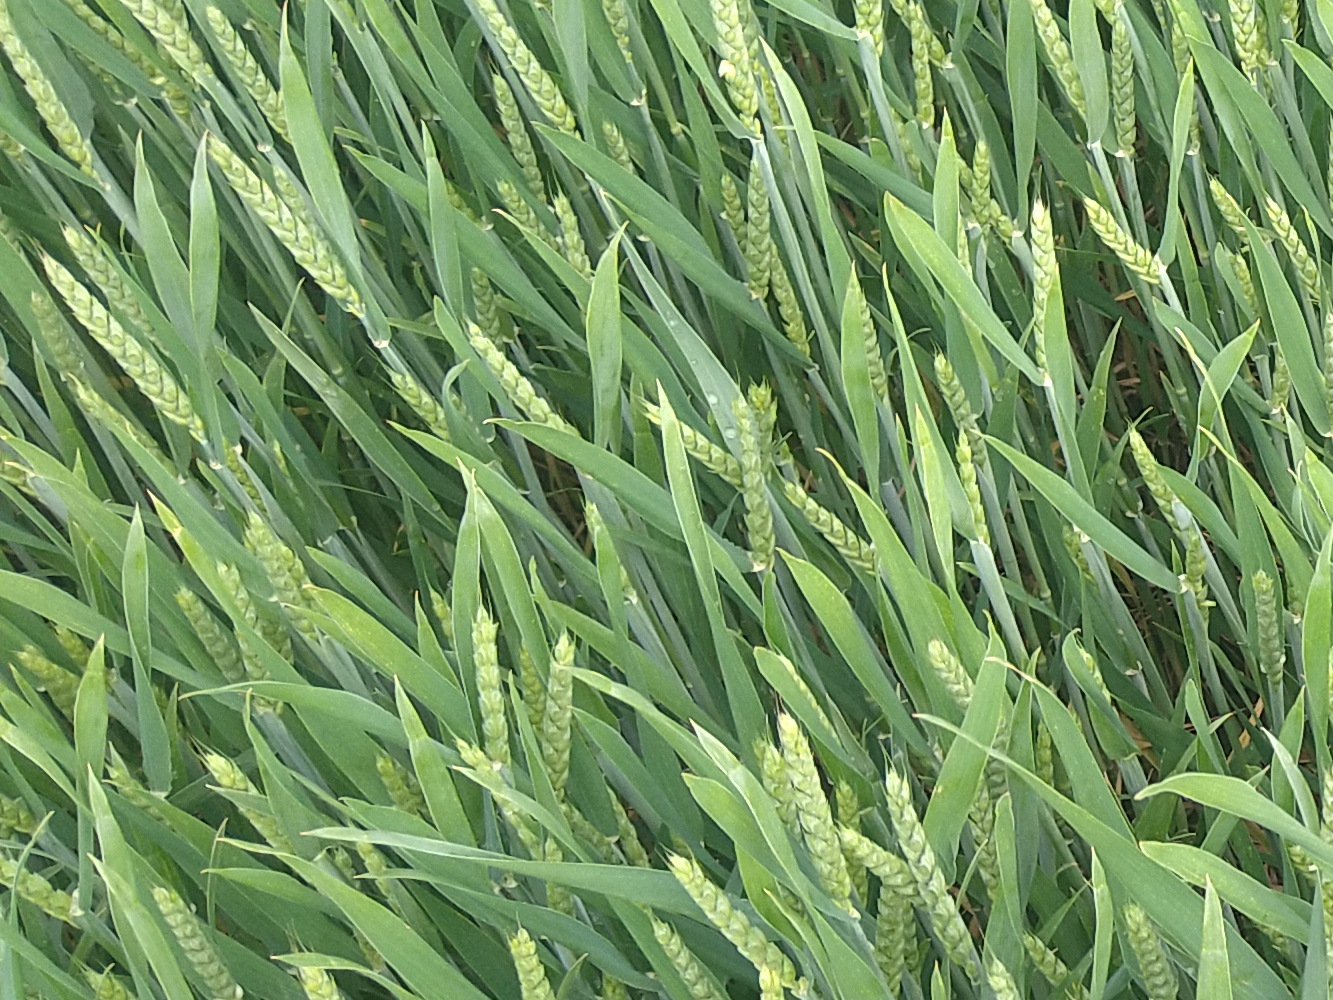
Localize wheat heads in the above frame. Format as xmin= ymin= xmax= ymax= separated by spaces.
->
xmin=1035 ymin=199 xmax=1050 ymax=363
xmin=1024 ymin=932 xmax=1100 ymax=1000
xmin=841 ymin=0 xmax=948 ymax=64
xmin=247 ymin=512 xmax=318 ymax=604
xmin=243 ymin=530 xmax=314 ymax=658
xmin=923 ymin=638 xmax=973 ymax=708
xmin=952 ymin=208 xmax=984 ymax=242
xmin=572 ymin=0 xmax=632 ymax=52
xmin=1062 ymin=529 xmax=1083 ymax=566
xmin=760 ymin=743 xmax=813 ymax=869
xmin=1321 ymin=310 xmax=1333 ymax=441
xmin=42 ymin=256 xmax=199 ymax=438
xmin=15 ymin=652 xmax=82 ymax=724
xmin=721 ymin=177 xmax=749 ymax=253
xmin=1266 ymin=195 xmax=1327 ymax=305
xmin=273 ymin=162 xmax=326 ymax=235
xmin=1073 ymin=638 xmax=1110 ymax=704
xmin=61 ymin=0 xmax=207 ymax=63
xmin=63 ymin=632 xmax=116 ymax=693
xmin=115 ymin=775 xmax=176 ymax=837
xmin=1175 ymin=15 xmax=1203 ymax=151
xmin=1021 ymin=0 xmax=1089 ymax=109
xmin=735 ymin=0 xmax=791 ymax=139
xmin=373 ymin=752 xmax=413 ymax=815
xmin=1254 ymin=569 xmax=1286 ymax=691
xmin=77 ymin=52 xmax=126 ymax=101
xmin=835 ymin=776 xmax=866 ymax=908
xmin=738 ymin=404 xmax=780 ymax=569
xmin=49 ymin=0 xmax=163 ymax=74
xmin=755 ymin=394 xmax=775 ymax=464
xmin=0 ymin=862 xmax=81 ymax=927
xmin=833 ymin=830 xmax=927 ymax=912
xmin=667 ymin=852 xmax=800 ymax=987
xmin=890 ymin=111 xmax=924 ymax=178
xmin=208 ymin=139 xmax=359 ymax=312
xmin=698 ymin=0 xmax=762 ymax=119
xmin=602 ymin=122 xmax=638 ymax=176
xmin=447 ymin=182 xmax=475 ymax=225
xmin=1187 ymin=537 xmax=1194 ymax=590
xmin=1313 ymin=881 xmax=1333 ymax=945
xmin=970 ymin=140 xmax=994 ymax=209
xmin=746 ymin=149 xmax=769 ymax=298
xmin=426 ymin=587 xmax=451 ymax=654
xmin=773 ymin=713 xmax=849 ymax=901
xmin=0 ymin=217 xmax=24 ymax=255
xmin=1209 ymin=182 xmax=1250 ymax=247
xmin=474 ymin=606 xmax=507 ymax=775
xmin=137 ymin=0 xmax=197 ymax=88
xmin=1038 ymin=723 xmax=1051 ymax=784
xmin=33 ymin=295 xmax=96 ymax=404
xmin=0 ymin=133 xmax=27 ymax=149
xmin=544 ymin=637 xmax=574 ymax=797
xmin=0 ymin=0 xmax=102 ymax=185
xmin=880 ymin=877 xmax=907 ymax=1000
xmin=457 ymin=746 xmax=537 ymax=869
xmin=1328 ymin=649 xmax=1333 ymax=754
xmin=904 ymin=898 xmax=920 ymax=982
xmin=386 ymin=368 xmax=446 ymax=437
xmin=174 ymin=586 xmax=246 ymax=686
xmin=509 ymin=928 xmax=574 ymax=1000
xmin=1113 ymin=0 xmax=1138 ymax=144
xmin=496 ymin=182 xmax=558 ymax=250
xmin=956 ymin=216 xmax=973 ymax=280
xmin=263 ymin=616 xmax=293 ymax=685
xmin=518 ymin=650 xmax=541 ymax=746
xmin=1327 ymin=116 xmax=1333 ymax=227
xmin=202 ymin=752 xmax=357 ymax=887
xmin=959 ymin=171 xmax=1020 ymax=244
xmin=956 ymin=425 xmax=996 ymax=538
xmin=1269 ymin=333 xmax=1284 ymax=419
xmin=461 ymin=320 xmax=579 ymax=435
xmin=1287 ymin=842 xmax=1318 ymax=888
xmin=986 ymin=956 xmax=1047 ymax=1000
xmin=990 ymin=725 xmax=1012 ymax=793
xmin=1293 ymin=909 xmax=1333 ymax=1000
xmin=62 ymin=227 xmax=173 ymax=358
xmin=490 ymin=73 xmax=541 ymax=172
xmin=0 ymin=786 xmax=43 ymax=829
xmin=595 ymin=785 xmax=651 ymax=866
xmin=1082 ymin=193 xmax=1164 ymax=287
xmin=201 ymin=8 xmax=292 ymax=144
xmin=1055 ymin=0 xmax=1113 ymax=25
xmin=85 ymin=966 xmax=169 ymax=1000
xmin=965 ymin=768 xmax=1004 ymax=901
xmin=772 ymin=477 xmax=879 ymax=579
xmin=646 ymin=400 xmax=739 ymax=485
xmin=547 ymin=837 xmax=574 ymax=919
xmin=469 ymin=258 xmax=503 ymax=336
xmin=151 ymin=885 xmax=243 ymax=999
xmin=467 ymin=0 xmax=583 ymax=139
xmin=1122 ymin=900 xmax=1178 ymax=1000
xmin=856 ymin=0 xmax=880 ymax=55
xmin=858 ymin=282 xmax=887 ymax=403
xmin=345 ymin=829 xmax=396 ymax=899
xmin=911 ymin=0 xmax=934 ymax=131
xmin=1255 ymin=917 xmax=1288 ymax=957
xmin=541 ymin=181 xmax=594 ymax=281
xmin=1129 ymin=431 xmax=1212 ymax=571
xmin=935 ymin=352 xmax=983 ymax=463
xmin=1286 ymin=565 xmax=1299 ymax=619
xmin=601 ymin=968 xmax=630 ymax=1000
xmin=561 ymin=805 xmax=625 ymax=868
xmin=652 ymin=916 xmax=754 ymax=1000
xmin=1217 ymin=0 xmax=1259 ymax=72
xmin=225 ymin=443 xmax=262 ymax=516
xmin=448 ymin=389 xmax=478 ymax=436
xmin=220 ymin=569 xmax=268 ymax=705
xmin=767 ymin=238 xmax=810 ymax=356
xmin=884 ymin=765 xmax=976 ymax=969
xmin=981 ymin=0 xmax=999 ymax=20
xmin=1275 ymin=0 xmax=1300 ymax=35
xmin=1321 ymin=758 xmax=1333 ymax=847
xmin=392 ymin=759 xmax=430 ymax=814
xmin=1230 ymin=250 xmax=1259 ymax=309
xmin=83 ymin=389 xmax=177 ymax=476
